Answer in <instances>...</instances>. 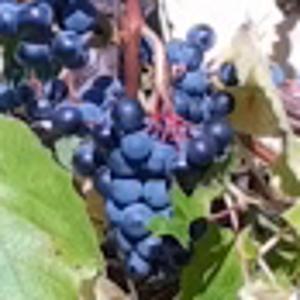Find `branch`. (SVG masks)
<instances>
[{"instance_id": "branch-1", "label": "branch", "mask_w": 300, "mask_h": 300, "mask_svg": "<svg viewBox=\"0 0 300 300\" xmlns=\"http://www.w3.org/2000/svg\"><path fill=\"white\" fill-rule=\"evenodd\" d=\"M142 22V4L139 0H126L123 4L121 37L122 79L126 82L127 95L132 101L140 98V44L138 24Z\"/></svg>"}]
</instances>
